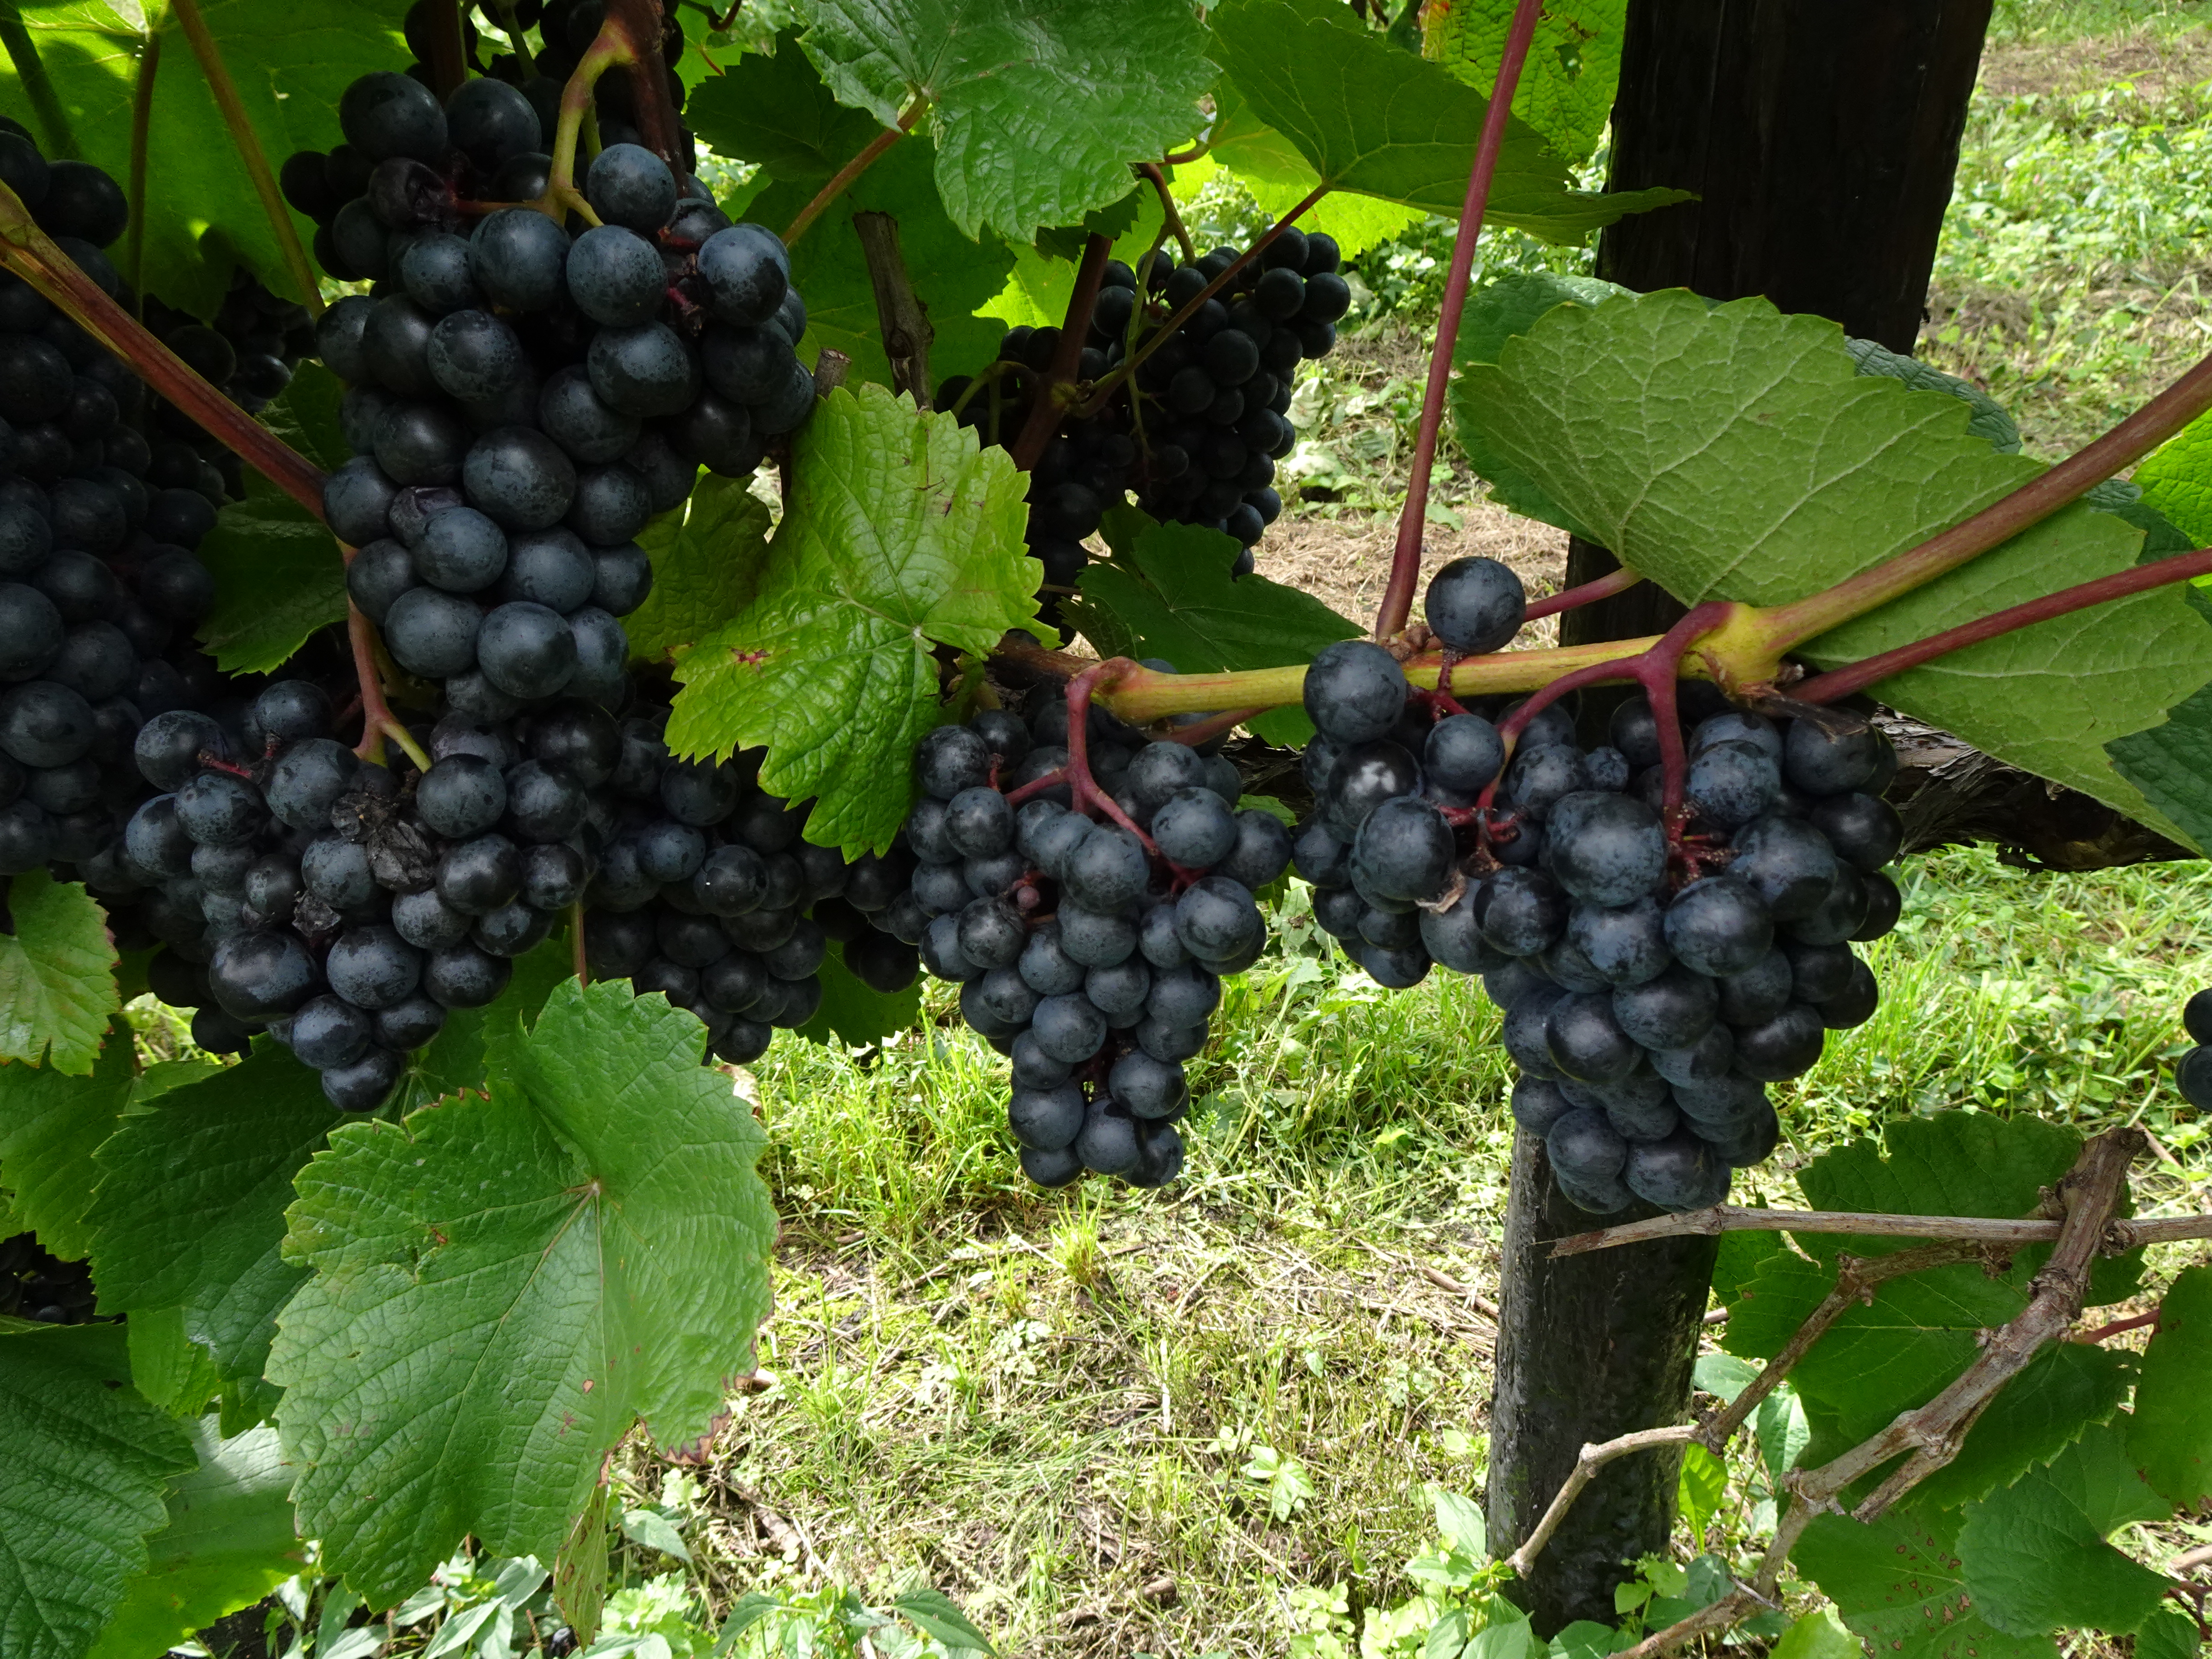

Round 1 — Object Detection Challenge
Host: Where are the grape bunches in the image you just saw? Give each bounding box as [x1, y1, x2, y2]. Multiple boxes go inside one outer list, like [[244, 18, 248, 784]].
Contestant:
[[1293, 557, 1568, 989], [812, 896, 920, 993], [2, 474, 216, 893], [2175, 990, 2212, 1111], [844, 660, 1294, 1188], [403, 0, 697, 174], [125, 678, 622, 1114], [934, 325, 1126, 688], [0, 114, 151, 479], [1484, 695, 1901, 1217], [282, 72, 815, 725], [1092, 226, 1351, 576], [123, 219, 322, 501], [581, 702, 853, 1068]]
